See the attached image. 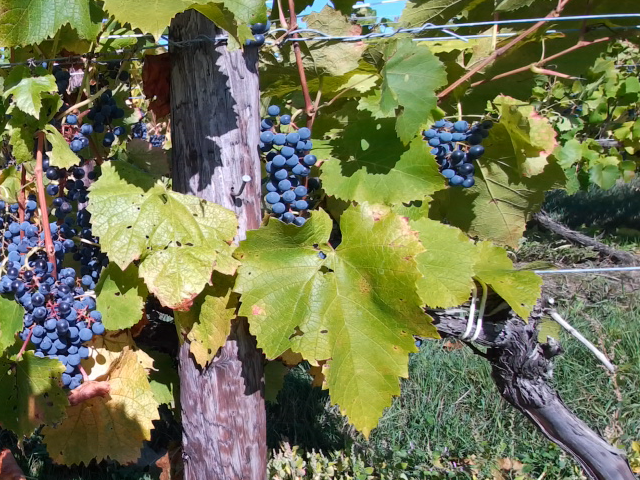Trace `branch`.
<instances>
[{"instance_id":"1","label":"branch","mask_w":640,"mask_h":480,"mask_svg":"<svg viewBox=\"0 0 640 480\" xmlns=\"http://www.w3.org/2000/svg\"><path fill=\"white\" fill-rule=\"evenodd\" d=\"M626 34V31L624 29L621 30H613L611 32H607L601 35H598L596 37L593 38H589L587 40H582L576 44H574L573 46L565 49V50H561L558 51L557 53H553L551 55H547L545 58H541L538 60H535L534 62H530L527 64H523L521 66H517L514 68H510L506 71L500 72L496 75L493 76H489V77H485L482 79H479L478 81H475L471 84V87L473 89H477L480 88L481 86L487 85V84H491V83H495V82H499L502 79L508 78L512 75H516V74H520L523 73L525 71H530L532 69H536L537 67L543 66V65H547L550 62H553L555 60H559L560 58L563 57H567L573 53H576L577 51H579L582 48L585 47H589L591 45H595L598 43H601L603 41L609 40V39H613L616 37H623Z\"/></svg>"},{"instance_id":"2","label":"branch","mask_w":640,"mask_h":480,"mask_svg":"<svg viewBox=\"0 0 640 480\" xmlns=\"http://www.w3.org/2000/svg\"><path fill=\"white\" fill-rule=\"evenodd\" d=\"M45 139V133L40 131L38 133V137L36 140L35 146V173H36V188H37V196H38V209H39V218L44 230V251L46 253V257L48 261L52 263L53 271L51 275L53 278L57 277L56 272V250L53 245V235L51 234L50 223L47 219L46 215V207H45V193H44V181H43V171H42V149L43 143Z\"/></svg>"},{"instance_id":"3","label":"branch","mask_w":640,"mask_h":480,"mask_svg":"<svg viewBox=\"0 0 640 480\" xmlns=\"http://www.w3.org/2000/svg\"><path fill=\"white\" fill-rule=\"evenodd\" d=\"M544 26H545V23H537L535 25H532V26L526 28L523 32H521L520 34L515 36L511 41H509L506 45L502 46L498 50H496V51L492 52L491 54H489L484 61L479 63L471 71L467 72L465 75L459 77L455 81H453V82L449 83L448 85H446L442 89V91L438 94V97L440 99H443L450 91L454 90L455 88H457L461 84H463V83L467 82L468 80L472 79L481 70L485 69L494 59L502 56L503 54L508 52L510 49H512L520 41H523L527 36H529V35L537 32V31L541 30Z\"/></svg>"},{"instance_id":"4","label":"branch","mask_w":640,"mask_h":480,"mask_svg":"<svg viewBox=\"0 0 640 480\" xmlns=\"http://www.w3.org/2000/svg\"><path fill=\"white\" fill-rule=\"evenodd\" d=\"M293 51L294 57L296 60L297 72L299 76V83L301 87V92L303 95L304 108L308 114L306 126L311 128L314 125V119L316 117V104L310 100V93L308 90V85L306 81V74L304 70L303 58L300 49V43H293Z\"/></svg>"},{"instance_id":"5","label":"branch","mask_w":640,"mask_h":480,"mask_svg":"<svg viewBox=\"0 0 640 480\" xmlns=\"http://www.w3.org/2000/svg\"><path fill=\"white\" fill-rule=\"evenodd\" d=\"M20 184H19V214L18 221L23 223L25 221V216L27 213V204H26V186L28 181V172L27 167L22 165L20 167Z\"/></svg>"},{"instance_id":"6","label":"branch","mask_w":640,"mask_h":480,"mask_svg":"<svg viewBox=\"0 0 640 480\" xmlns=\"http://www.w3.org/2000/svg\"><path fill=\"white\" fill-rule=\"evenodd\" d=\"M61 35H62V32L60 30H57L54 33L51 45H50L49 50H48V55H55V52H56L57 47L59 45V41H60Z\"/></svg>"}]
</instances>
